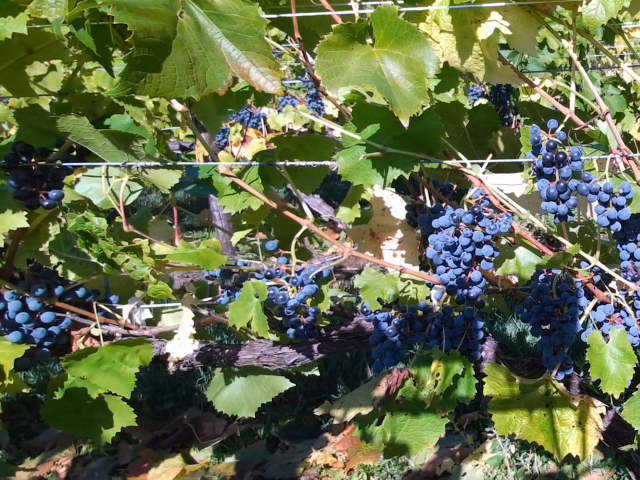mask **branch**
Wrapping results in <instances>:
<instances>
[{
	"mask_svg": "<svg viewBox=\"0 0 640 480\" xmlns=\"http://www.w3.org/2000/svg\"><path fill=\"white\" fill-rule=\"evenodd\" d=\"M291 24H292V29L293 32L296 36V40L299 46V50L301 53V56L303 58V61L305 63V68L306 71L311 79V81L313 82V85L315 86V89L317 90V93L325 100L327 101L329 104H331L336 111L346 120H351L353 118V115L349 112H347L342 105L334 98L331 97L323 88V86L321 85L320 80L318 79L313 66H312V61L311 58L309 56V53L307 51V47L303 38V34L302 31L300 30V26H299V22L298 19L296 17H293L291 19Z\"/></svg>",
	"mask_w": 640,
	"mask_h": 480,
	"instance_id": "obj_2",
	"label": "branch"
},
{
	"mask_svg": "<svg viewBox=\"0 0 640 480\" xmlns=\"http://www.w3.org/2000/svg\"><path fill=\"white\" fill-rule=\"evenodd\" d=\"M44 301L48 302L50 304L57 305L61 309L65 310V311H70V312L76 313V314H78V315H80L82 317L87 316L89 318H92V319H95V320H99L100 322L108 323L110 325L122 327V328L129 329V330H136L137 329L136 325L127 324V323H124V322H120V321L112 320L110 318L103 317L101 315H97V314L92 313V312H90L88 310H85L82 307L69 304V303H67L65 301H60V300H57V299H53V298L48 297V296L44 297Z\"/></svg>",
	"mask_w": 640,
	"mask_h": 480,
	"instance_id": "obj_3",
	"label": "branch"
},
{
	"mask_svg": "<svg viewBox=\"0 0 640 480\" xmlns=\"http://www.w3.org/2000/svg\"><path fill=\"white\" fill-rule=\"evenodd\" d=\"M572 274L577 277L578 279L583 280L588 288L593 291L598 297H600L601 299H603L605 302L610 303L611 299L605 295L604 293H602L597 287H595L593 284H591L581 273H579L577 270H573Z\"/></svg>",
	"mask_w": 640,
	"mask_h": 480,
	"instance_id": "obj_7",
	"label": "branch"
},
{
	"mask_svg": "<svg viewBox=\"0 0 640 480\" xmlns=\"http://www.w3.org/2000/svg\"><path fill=\"white\" fill-rule=\"evenodd\" d=\"M466 175L484 191L486 197L489 199L493 206L499 208L503 213L507 212L506 207L495 200L488 187L483 182H481L471 171H467Z\"/></svg>",
	"mask_w": 640,
	"mask_h": 480,
	"instance_id": "obj_5",
	"label": "branch"
},
{
	"mask_svg": "<svg viewBox=\"0 0 640 480\" xmlns=\"http://www.w3.org/2000/svg\"><path fill=\"white\" fill-rule=\"evenodd\" d=\"M170 103L173 108H175L180 114L183 115L186 123L190 127V130L192 131V133L194 134L198 142L201 144L203 149L206 151V153L212 158L213 161H219V158L217 157V155L211 150V148L207 145V143L204 141V139L196 129L195 124L190 119L188 112L185 109H183L178 103H176L174 99H171Z\"/></svg>",
	"mask_w": 640,
	"mask_h": 480,
	"instance_id": "obj_4",
	"label": "branch"
},
{
	"mask_svg": "<svg viewBox=\"0 0 640 480\" xmlns=\"http://www.w3.org/2000/svg\"><path fill=\"white\" fill-rule=\"evenodd\" d=\"M214 171L216 173H222L233 185H238L240 188H242V189L254 194L258 199H260L264 203L268 204L273 209H278L284 215L288 216L292 220H295L299 224L303 225L305 222H308L306 220H303L299 216L295 215L294 213L288 211L283 206H279L278 204L274 203L265 194H261L258 190L254 189L253 187H251V186H249L247 184H244L234 174H232L227 168H214ZM308 223L310 224L309 228L312 231H314L315 233H318V235L320 237L325 238L326 242H330V243L340 247L342 250L347 251L350 254H355V255L360 256L362 258H365L367 260H371V261H374V262L381 263V264H383L385 266L391 267L392 269L403 271V272L408 273V274L413 275V276H418V277H420V278H422L424 280H428V281L433 282V283H435L437 285L441 284V281L439 279L433 277V276L427 275V274L422 273L420 271H415V270L410 269V268L405 267V266L394 264L393 262H390V261H388V260H386L384 258L376 257L374 255L367 254V253H365L363 251L350 248V247L346 246L345 244H343L342 242H340L339 240L334 239V237L330 233L323 232L317 226H314L310 222H308Z\"/></svg>",
	"mask_w": 640,
	"mask_h": 480,
	"instance_id": "obj_1",
	"label": "branch"
},
{
	"mask_svg": "<svg viewBox=\"0 0 640 480\" xmlns=\"http://www.w3.org/2000/svg\"><path fill=\"white\" fill-rule=\"evenodd\" d=\"M510 226L512 227V229L517 232L518 234H520L521 236H523L527 241H529L530 243H532L540 252H542L545 256L547 257H552L553 253L546 247L542 246L538 241H536L532 236H530L528 233H526L525 231H523L521 228H519L515 222H511Z\"/></svg>",
	"mask_w": 640,
	"mask_h": 480,
	"instance_id": "obj_6",
	"label": "branch"
}]
</instances>
